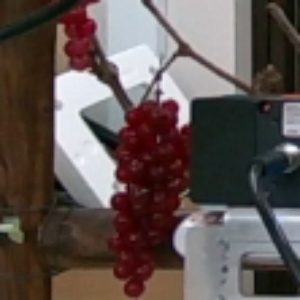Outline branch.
I'll use <instances>...</instances> for the list:
<instances>
[{"label": "branch", "mask_w": 300, "mask_h": 300, "mask_svg": "<svg viewBox=\"0 0 300 300\" xmlns=\"http://www.w3.org/2000/svg\"><path fill=\"white\" fill-rule=\"evenodd\" d=\"M141 4L147 8L150 12L152 17L156 19L162 28L166 30V32L178 43V49L171 55L169 58L156 72L155 76L153 77L149 87L145 91V94L142 98H140V102L146 100L150 92L156 85L157 81L162 80V76L168 66L175 62L178 57H192L196 59L197 62L203 65L208 71L214 73L221 79H225L226 82L232 84L233 86L243 90L245 94L252 99L256 100H291V99H300V94H267L261 93L260 87L262 79L268 82H276L281 81L283 78V73L274 68L273 64H269L266 66L263 72L258 73L257 75V84L256 88L247 87L246 84L239 80V78L230 75L228 72L224 71L223 69L217 67L211 61L206 60L205 58L201 57L197 52H195L192 47L186 42L176 31L175 29L165 20V17L162 13L158 10L151 0H141Z\"/></svg>", "instance_id": "1"}, {"label": "branch", "mask_w": 300, "mask_h": 300, "mask_svg": "<svg viewBox=\"0 0 300 300\" xmlns=\"http://www.w3.org/2000/svg\"><path fill=\"white\" fill-rule=\"evenodd\" d=\"M92 65H90L89 72L97 77L98 82L107 85L115 95L118 104L124 112L133 109L131 99L125 94L124 90L119 83V74L116 63L111 61L104 54L99 38H96V49L91 51Z\"/></svg>", "instance_id": "2"}]
</instances>
